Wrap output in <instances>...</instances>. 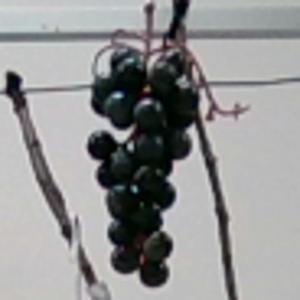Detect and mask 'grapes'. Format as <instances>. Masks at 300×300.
Instances as JSON below:
<instances>
[{
  "label": "grapes",
  "mask_w": 300,
  "mask_h": 300,
  "mask_svg": "<svg viewBox=\"0 0 300 300\" xmlns=\"http://www.w3.org/2000/svg\"><path fill=\"white\" fill-rule=\"evenodd\" d=\"M111 69L94 75L89 107L108 118L118 132L133 127L134 151L117 143L113 133L96 130L86 147L97 165L94 178L106 190L103 206L112 222L106 229L117 247L110 255L113 269L122 275L138 272L142 286L161 289L171 279L165 262L175 251L171 233L163 230L161 212L174 208L177 191L167 182L176 161L192 151L187 132L200 112L202 89L182 79L190 69L186 51L166 52L150 69L138 48L125 45L113 52Z\"/></svg>",
  "instance_id": "grapes-1"
}]
</instances>
